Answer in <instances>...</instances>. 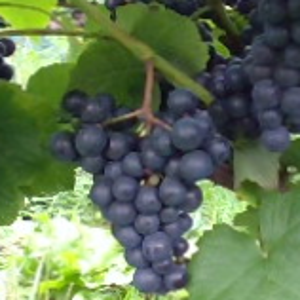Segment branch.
<instances>
[{
  "label": "branch",
  "mask_w": 300,
  "mask_h": 300,
  "mask_svg": "<svg viewBox=\"0 0 300 300\" xmlns=\"http://www.w3.org/2000/svg\"><path fill=\"white\" fill-rule=\"evenodd\" d=\"M78 12L97 28L86 26L63 29H4L0 30V38L8 36H82L108 37L120 44L132 55L142 61H151L157 71L168 79L173 86L193 94L198 100L208 104L216 97L210 94L203 86L197 84L188 74L179 67L168 62L165 58L152 51V48L129 35L122 25L113 19L112 13L105 6L93 0L81 3L73 0Z\"/></svg>",
  "instance_id": "obj_1"
}]
</instances>
